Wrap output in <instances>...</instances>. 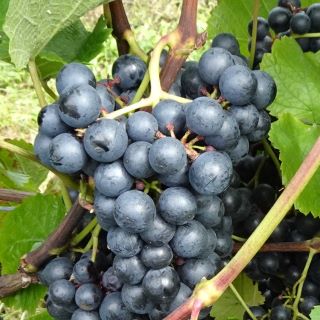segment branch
Masks as SVG:
<instances>
[{
	"label": "branch",
	"mask_w": 320,
	"mask_h": 320,
	"mask_svg": "<svg viewBox=\"0 0 320 320\" xmlns=\"http://www.w3.org/2000/svg\"><path fill=\"white\" fill-rule=\"evenodd\" d=\"M320 165V135L269 213L246 242L234 241L235 254L212 279L205 276L198 282L193 295L163 320H198L200 309L213 306L251 259L260 251H312L320 253V238L303 242L266 243L274 229L285 217L295 200L311 180Z\"/></svg>",
	"instance_id": "30e6481e"
},
{
	"label": "branch",
	"mask_w": 320,
	"mask_h": 320,
	"mask_svg": "<svg viewBox=\"0 0 320 320\" xmlns=\"http://www.w3.org/2000/svg\"><path fill=\"white\" fill-rule=\"evenodd\" d=\"M86 212L81 208L78 194L72 208L56 232L42 247L22 256L17 274L0 277V299L15 296L31 286H42L37 276L39 269L46 260L60 256L67 249L70 237L81 224Z\"/></svg>",
	"instance_id": "325d2c04"
},
{
	"label": "branch",
	"mask_w": 320,
	"mask_h": 320,
	"mask_svg": "<svg viewBox=\"0 0 320 320\" xmlns=\"http://www.w3.org/2000/svg\"><path fill=\"white\" fill-rule=\"evenodd\" d=\"M197 2L198 0H183L182 13L177 27V43L172 49L169 47L165 65L159 73L161 89L165 92H168L180 66L194 48L197 39Z\"/></svg>",
	"instance_id": "170604dd"
},
{
	"label": "branch",
	"mask_w": 320,
	"mask_h": 320,
	"mask_svg": "<svg viewBox=\"0 0 320 320\" xmlns=\"http://www.w3.org/2000/svg\"><path fill=\"white\" fill-rule=\"evenodd\" d=\"M111 18H112V35L115 37L118 45L119 56L129 53L130 46L124 37L126 30H131L122 0H114L109 2Z\"/></svg>",
	"instance_id": "45aa463d"
}]
</instances>
